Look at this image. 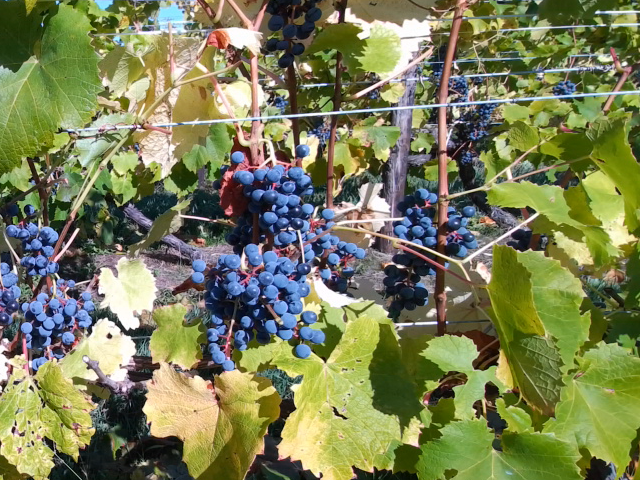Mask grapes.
<instances>
[{"label": "grapes", "instance_id": "f8a65327", "mask_svg": "<svg viewBox=\"0 0 640 480\" xmlns=\"http://www.w3.org/2000/svg\"><path fill=\"white\" fill-rule=\"evenodd\" d=\"M402 222L395 226V234L399 239L412 241L427 248L436 245V231L427 207L407 208Z\"/></svg>", "mask_w": 640, "mask_h": 480}, {"label": "grapes", "instance_id": "e5b3c951", "mask_svg": "<svg viewBox=\"0 0 640 480\" xmlns=\"http://www.w3.org/2000/svg\"><path fill=\"white\" fill-rule=\"evenodd\" d=\"M211 322L215 325L207 330V339L210 342L217 341L220 335L228 332V326L224 323L225 317L220 312H214L211 316Z\"/></svg>", "mask_w": 640, "mask_h": 480}, {"label": "grapes", "instance_id": "01657485", "mask_svg": "<svg viewBox=\"0 0 640 480\" xmlns=\"http://www.w3.org/2000/svg\"><path fill=\"white\" fill-rule=\"evenodd\" d=\"M254 178L258 182H262L265 178L268 182L276 184L277 189H273L269 184H258L253 186ZM233 180L236 183L245 184L243 194L247 198H251L255 203L266 204L272 208L266 210L260 218V227L263 230H269L273 237V243L276 246H288L298 242L297 233L294 230L283 231L287 225L295 230H301L302 243L308 242L304 246V261L306 263H298L287 257L279 258L277 253L267 250L263 255L259 252L256 243H248L245 247L247 261L252 266H259L263 262L265 271L259 274V277H251L246 286L240 283V274L237 271L228 272L224 276V282L221 279L222 273L230 269L236 270L241 265V258L237 253L224 254L218 258V263L209 272V278L206 280L204 272L207 269L206 263L200 258H195L191 262V268L194 272L191 279L196 284L205 282V287L209 290L206 294L205 306L215 311L221 306L223 299L238 298L243 296V302L249 306H257L261 301L260 295H265V302L273 305V312L280 316L282 326H278L274 320H268L266 310L257 306L252 310V315L246 314L240 317V325L245 330H238L234 333L233 347L240 351L247 350V342L254 339L251 330L255 326V319L261 321L265 331L270 335H277L283 341H289L294 337V328L297 325V318L306 325H314L319 315L313 310H304L301 298L311 293V286L306 282V274L311 271L310 263L314 257H320L326 249L333 246L338 247L336 253L328 255L327 263L336 265L341 259L353 255L356 259H365L367 257V249L358 247L356 243L342 241L339 235H331L327 233L321 237L315 238L323 231H326L335 225V221H327L324 227L315 228V233H307L310 231L311 224L306 219L314 213V205L306 203L301 205L299 196L313 195L315 187L312 184V178L306 175V169L303 166H292L287 171L283 165H275L266 167L265 169H257L254 174L249 170H238Z\"/></svg>", "mask_w": 640, "mask_h": 480}, {"label": "grapes", "instance_id": "ef6de9ee", "mask_svg": "<svg viewBox=\"0 0 640 480\" xmlns=\"http://www.w3.org/2000/svg\"><path fill=\"white\" fill-rule=\"evenodd\" d=\"M414 288L415 304L418 307H426L429 304V292L427 287L423 283L418 282L414 285Z\"/></svg>", "mask_w": 640, "mask_h": 480}, {"label": "grapes", "instance_id": "5460f4e3", "mask_svg": "<svg viewBox=\"0 0 640 480\" xmlns=\"http://www.w3.org/2000/svg\"><path fill=\"white\" fill-rule=\"evenodd\" d=\"M0 274L5 286V290L0 289V306L3 307V311H0V325L10 326L13 322L11 313L18 309V302L15 299L21 297V289L17 284L19 276L11 272L8 262L0 263Z\"/></svg>", "mask_w": 640, "mask_h": 480}, {"label": "grapes", "instance_id": "1ff8f66d", "mask_svg": "<svg viewBox=\"0 0 640 480\" xmlns=\"http://www.w3.org/2000/svg\"><path fill=\"white\" fill-rule=\"evenodd\" d=\"M416 198L418 200H426L430 204H434L438 201V195L435 192L430 193L428 189L418 188L416 190Z\"/></svg>", "mask_w": 640, "mask_h": 480}, {"label": "grapes", "instance_id": "0513c4c2", "mask_svg": "<svg viewBox=\"0 0 640 480\" xmlns=\"http://www.w3.org/2000/svg\"><path fill=\"white\" fill-rule=\"evenodd\" d=\"M38 233V225L28 222L25 226L9 225L7 234L11 238H20L21 248L29 251H42L44 255L35 258L25 256L21 259V265L27 268L29 275H41L45 277L47 273H57L60 270L58 262H50L46 257L52 253L53 244L59 237V232L52 227H44L40 230L39 239H33Z\"/></svg>", "mask_w": 640, "mask_h": 480}, {"label": "grapes", "instance_id": "2adb6a1f", "mask_svg": "<svg viewBox=\"0 0 640 480\" xmlns=\"http://www.w3.org/2000/svg\"><path fill=\"white\" fill-rule=\"evenodd\" d=\"M299 336L303 340L316 345H323L327 340L326 334L320 328L302 327L299 331Z\"/></svg>", "mask_w": 640, "mask_h": 480}, {"label": "grapes", "instance_id": "b958b902", "mask_svg": "<svg viewBox=\"0 0 640 480\" xmlns=\"http://www.w3.org/2000/svg\"><path fill=\"white\" fill-rule=\"evenodd\" d=\"M62 287L74 288L75 281L58 278L57 279V295L65 302L61 303L58 298L51 299L49 301V295L46 292H39L35 300L30 303H23L21 310L23 315L28 320L21 324V333L26 336L25 348H32V333L34 328L38 329L39 344L43 347L52 345V334L56 337L62 336V344L71 346L76 341V335L71 331H64L65 328L75 324V319H78L79 327H89L93 321V317L89 312H94L96 309L95 302L93 300L92 293L90 291H84L82 293L83 308L77 306L78 300L76 298L68 299L62 292ZM48 308L52 310L53 316H47L43 310V305L47 302Z\"/></svg>", "mask_w": 640, "mask_h": 480}, {"label": "grapes", "instance_id": "84f90ec7", "mask_svg": "<svg viewBox=\"0 0 640 480\" xmlns=\"http://www.w3.org/2000/svg\"><path fill=\"white\" fill-rule=\"evenodd\" d=\"M475 213L473 206H466L462 209V214L457 213V209L449 206L447 210L446 246L451 255L457 257H465L468 249H476L478 241L476 236L466 227L469 224V218Z\"/></svg>", "mask_w": 640, "mask_h": 480}, {"label": "grapes", "instance_id": "83cd7487", "mask_svg": "<svg viewBox=\"0 0 640 480\" xmlns=\"http://www.w3.org/2000/svg\"><path fill=\"white\" fill-rule=\"evenodd\" d=\"M207 352L211 354L212 361L216 365H221L224 371L231 372L235 369L234 362L226 359V354L221 350V346L218 343H209Z\"/></svg>", "mask_w": 640, "mask_h": 480}]
</instances>
